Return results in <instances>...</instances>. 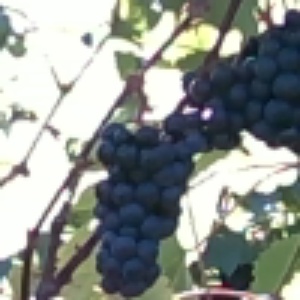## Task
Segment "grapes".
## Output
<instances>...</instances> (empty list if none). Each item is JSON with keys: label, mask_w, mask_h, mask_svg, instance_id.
<instances>
[{"label": "grapes", "mask_w": 300, "mask_h": 300, "mask_svg": "<svg viewBox=\"0 0 300 300\" xmlns=\"http://www.w3.org/2000/svg\"><path fill=\"white\" fill-rule=\"evenodd\" d=\"M182 88L189 103L163 120L174 139L159 142L156 128L131 135L119 122L101 132L96 157L108 180L96 186L94 213L104 225L97 266L107 294L137 297L160 277L155 256L182 214L191 153L234 149L247 128L270 148L300 156V11H290L286 25L249 37L231 62L187 72Z\"/></svg>", "instance_id": "01657485"}]
</instances>
